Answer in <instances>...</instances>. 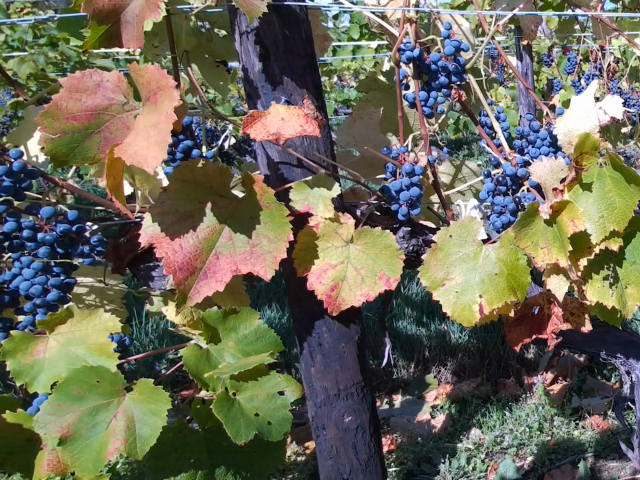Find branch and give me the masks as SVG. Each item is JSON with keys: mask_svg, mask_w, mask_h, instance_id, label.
<instances>
[{"mask_svg": "<svg viewBox=\"0 0 640 480\" xmlns=\"http://www.w3.org/2000/svg\"><path fill=\"white\" fill-rule=\"evenodd\" d=\"M477 17H478V19L480 21V24L482 25L483 29L485 30V32L487 34H490L491 33V29L489 28L488 24L486 23L484 17L483 16H477Z\"/></svg>", "mask_w": 640, "mask_h": 480, "instance_id": "branch-10", "label": "branch"}, {"mask_svg": "<svg viewBox=\"0 0 640 480\" xmlns=\"http://www.w3.org/2000/svg\"><path fill=\"white\" fill-rule=\"evenodd\" d=\"M430 170H431V175H432V179L433 182L431 183V187L436 190L437 196L439 198V200L442 201V206L446 212V215L448 217V221L449 222H453L454 221V215L451 213V210L449 208V206L447 205V202L445 200V197L441 191V188L439 187V183H438V176L436 173V168L434 165L430 166Z\"/></svg>", "mask_w": 640, "mask_h": 480, "instance_id": "branch-7", "label": "branch"}, {"mask_svg": "<svg viewBox=\"0 0 640 480\" xmlns=\"http://www.w3.org/2000/svg\"><path fill=\"white\" fill-rule=\"evenodd\" d=\"M40 177L42 179H44L45 181H48L53 186H56V187H59V188H62L64 190H66V191H69L71 193H75L77 195H80L83 198H86V199H88L90 201H93V202H95L97 204H100V205H102V206H104V207H106V208H108L110 210H113L114 212H117L119 210V207L115 203L110 202L109 200H107L105 198L99 197L96 194L88 192V191H86V190H84V189H82L80 187L68 184V183H66L65 181H62V180L55 179L53 176H51L50 174H48L46 172H42L40 174Z\"/></svg>", "mask_w": 640, "mask_h": 480, "instance_id": "branch-1", "label": "branch"}, {"mask_svg": "<svg viewBox=\"0 0 640 480\" xmlns=\"http://www.w3.org/2000/svg\"><path fill=\"white\" fill-rule=\"evenodd\" d=\"M491 41L493 42L496 50L498 51V53L500 54V56L502 57V59L505 61V64L508 66L510 72L512 73V75L520 81V83L529 91L530 95L533 97V99L539 104V106L542 108V110L544 111V113L546 114V116L548 117V119L550 120L551 123H555L556 119L555 117L552 115V113L550 112L549 108L544 104V102L542 101V99L537 95V93L535 92V90L532 88L531 85H529V83L516 71V69L514 68L513 64L511 63L510 59L508 58V56L506 55V53L504 52V50L501 48V45L499 43L498 40L495 39V37L491 38Z\"/></svg>", "mask_w": 640, "mask_h": 480, "instance_id": "branch-2", "label": "branch"}, {"mask_svg": "<svg viewBox=\"0 0 640 480\" xmlns=\"http://www.w3.org/2000/svg\"><path fill=\"white\" fill-rule=\"evenodd\" d=\"M466 74L469 76L470 80L474 84V87H475V89L477 91V94H478V97H479V101H480L483 109L485 110L487 116L492 121L493 126H494V128H495V130L497 132V135L500 138V140H501V142H502V144H503V146H504V148H505V150H506V152L508 154L509 160L510 161H514L515 157H514V154L512 152V149L510 148V145L507 142V139L505 138V135L503 134V132H502V130H501L499 124H498V121H497L496 117L491 112L489 106L487 105V103L485 101V98H484V95H483V91H482V89L480 87V84H479L477 78L474 76V74L472 73V71L470 69L466 70Z\"/></svg>", "mask_w": 640, "mask_h": 480, "instance_id": "branch-3", "label": "branch"}, {"mask_svg": "<svg viewBox=\"0 0 640 480\" xmlns=\"http://www.w3.org/2000/svg\"><path fill=\"white\" fill-rule=\"evenodd\" d=\"M416 109H417V115H418V119H419V131H420V136L424 138V147H425V155L426 156H430L431 155V148H430V144H429V136L427 133V128L424 125V117H423V113H422V106H421V101L417 100L416 101Z\"/></svg>", "mask_w": 640, "mask_h": 480, "instance_id": "branch-8", "label": "branch"}, {"mask_svg": "<svg viewBox=\"0 0 640 480\" xmlns=\"http://www.w3.org/2000/svg\"><path fill=\"white\" fill-rule=\"evenodd\" d=\"M458 104L465 110L467 116L469 117L471 123L473 124V127L475 128V130L477 131V133L487 142V144L490 146V148L493 150V152L495 153L496 156H500L501 152L499 151L498 147L495 145V143L491 140V138L485 134V132L482 130V128L479 126L477 120L475 119L474 114L472 113V111L470 110L469 106L462 100L459 99L458 100Z\"/></svg>", "mask_w": 640, "mask_h": 480, "instance_id": "branch-6", "label": "branch"}, {"mask_svg": "<svg viewBox=\"0 0 640 480\" xmlns=\"http://www.w3.org/2000/svg\"><path fill=\"white\" fill-rule=\"evenodd\" d=\"M164 23H165L167 39L169 43L170 65H171L172 76L174 81V88L176 90H180L182 88V85L180 82V74H179V68L177 63V48H176L177 43L175 42L172 20L169 14H166L164 16Z\"/></svg>", "mask_w": 640, "mask_h": 480, "instance_id": "branch-4", "label": "branch"}, {"mask_svg": "<svg viewBox=\"0 0 640 480\" xmlns=\"http://www.w3.org/2000/svg\"><path fill=\"white\" fill-rule=\"evenodd\" d=\"M592 18L600 23L605 24L606 26H608L613 32L617 33L618 35H620L621 37H623L630 45H632L633 47L637 48L638 50H640V44L637 43L636 41H634L632 38H630L628 35L624 34V31H622L621 29L617 28L613 23H611L608 19L602 18L600 16H592Z\"/></svg>", "mask_w": 640, "mask_h": 480, "instance_id": "branch-9", "label": "branch"}, {"mask_svg": "<svg viewBox=\"0 0 640 480\" xmlns=\"http://www.w3.org/2000/svg\"><path fill=\"white\" fill-rule=\"evenodd\" d=\"M432 17L434 19V22L436 23V25L438 26L440 31L444 30V25L441 23V21L439 20L438 14L437 13H433Z\"/></svg>", "mask_w": 640, "mask_h": 480, "instance_id": "branch-12", "label": "branch"}, {"mask_svg": "<svg viewBox=\"0 0 640 480\" xmlns=\"http://www.w3.org/2000/svg\"><path fill=\"white\" fill-rule=\"evenodd\" d=\"M400 54L394 55V77L396 87V100H397V119L399 120V145L404 146V115L402 114V97H401V84L399 74Z\"/></svg>", "mask_w": 640, "mask_h": 480, "instance_id": "branch-5", "label": "branch"}, {"mask_svg": "<svg viewBox=\"0 0 640 480\" xmlns=\"http://www.w3.org/2000/svg\"><path fill=\"white\" fill-rule=\"evenodd\" d=\"M568 5L576 8V9H579L581 11H590L589 8H587V7H585V6L581 5V4H578V3L574 2V1H569Z\"/></svg>", "mask_w": 640, "mask_h": 480, "instance_id": "branch-11", "label": "branch"}]
</instances>
